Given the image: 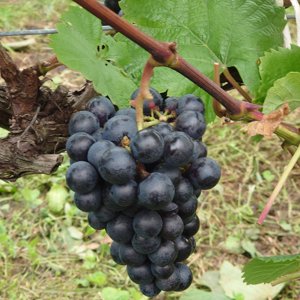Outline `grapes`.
<instances>
[{
	"mask_svg": "<svg viewBox=\"0 0 300 300\" xmlns=\"http://www.w3.org/2000/svg\"><path fill=\"white\" fill-rule=\"evenodd\" d=\"M205 104L194 95L163 98L153 87L136 109L115 111L105 96L90 99L68 124L66 184L76 207L113 239L110 254L140 292L183 291L192 280L181 263L195 250L201 190L214 188L221 168L207 157Z\"/></svg>",
	"mask_w": 300,
	"mask_h": 300,
	"instance_id": "obj_1",
	"label": "grapes"
}]
</instances>
